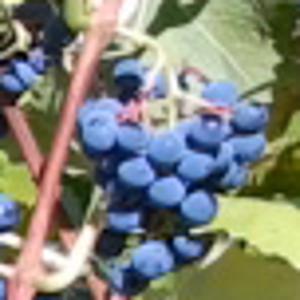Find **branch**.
<instances>
[{"label": "branch", "mask_w": 300, "mask_h": 300, "mask_svg": "<svg viewBox=\"0 0 300 300\" xmlns=\"http://www.w3.org/2000/svg\"><path fill=\"white\" fill-rule=\"evenodd\" d=\"M124 0H100L86 36L85 46L75 59L72 82L58 128L52 154L47 163L37 152L35 140L24 112L12 96H5L0 106L9 117L20 145L23 160L35 174L39 192L35 201L34 217L30 231L18 258L15 273L5 286L8 300L32 298L47 276L43 263L42 243L52 214L63 241L71 250L77 270L89 288L91 300H116L113 291L105 285L95 271L84 241L74 228L58 191L67 152L80 110L89 94L95 67L114 36Z\"/></svg>", "instance_id": "1"}]
</instances>
